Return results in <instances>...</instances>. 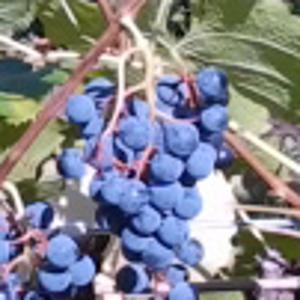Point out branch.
Segmentation results:
<instances>
[{
    "mask_svg": "<svg viewBox=\"0 0 300 300\" xmlns=\"http://www.w3.org/2000/svg\"><path fill=\"white\" fill-rule=\"evenodd\" d=\"M145 5V0H131L130 4L123 7L111 20L109 28L104 32L101 42L89 51V56L81 62L75 71V77L70 79L53 97L50 104L27 127L22 140L10 152L7 159L0 164V185L6 183V175L15 168L18 161L29 151L30 146L36 141L41 129L47 124L63 106L66 97L83 83L84 75L99 58L110 48L117 39L118 33L126 24L138 15Z\"/></svg>",
    "mask_w": 300,
    "mask_h": 300,
    "instance_id": "30e6481e",
    "label": "branch"
},
{
    "mask_svg": "<svg viewBox=\"0 0 300 300\" xmlns=\"http://www.w3.org/2000/svg\"><path fill=\"white\" fill-rule=\"evenodd\" d=\"M223 138L232 146V148L240 155L246 165L256 174L258 179L268 188L283 196L288 202L297 209H300V193L286 187L277 178V176L261 163L257 162L247 148L239 141V139L230 131L223 132Z\"/></svg>",
    "mask_w": 300,
    "mask_h": 300,
    "instance_id": "325d2c04",
    "label": "branch"
}]
</instances>
